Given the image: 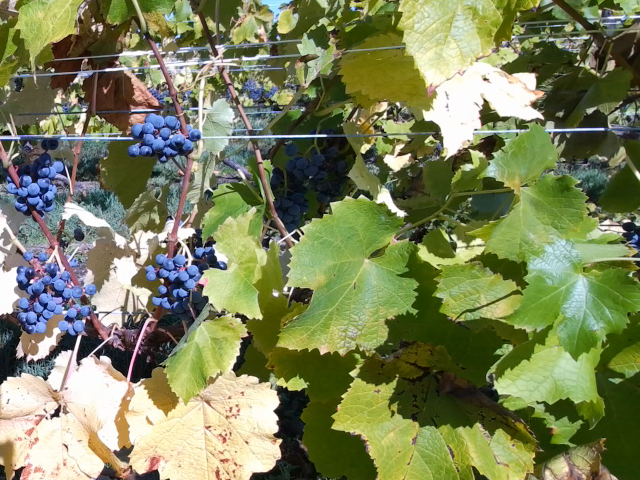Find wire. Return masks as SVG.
<instances>
[{"mask_svg": "<svg viewBox=\"0 0 640 480\" xmlns=\"http://www.w3.org/2000/svg\"><path fill=\"white\" fill-rule=\"evenodd\" d=\"M440 130L431 131H395V132H314V133H272L268 135L263 134H249L245 132L234 133H213L202 136L203 140L215 139V138H236L243 137L247 139H261L271 140L274 138H316V137H333V138H347V137H397V136H434L440 135Z\"/></svg>", "mask_w": 640, "mask_h": 480, "instance_id": "obj_1", "label": "wire"}, {"mask_svg": "<svg viewBox=\"0 0 640 480\" xmlns=\"http://www.w3.org/2000/svg\"><path fill=\"white\" fill-rule=\"evenodd\" d=\"M41 140H59L66 142H88V141H119L136 142V137L121 136H85L68 137L61 135H41L40 133H17L16 136H0V141L35 142Z\"/></svg>", "mask_w": 640, "mask_h": 480, "instance_id": "obj_2", "label": "wire"}, {"mask_svg": "<svg viewBox=\"0 0 640 480\" xmlns=\"http://www.w3.org/2000/svg\"><path fill=\"white\" fill-rule=\"evenodd\" d=\"M161 67H162L161 63H154V64L136 65V66H111L106 68H89V69H82V70H47V71H38V72L15 73L12 75V78L17 79V78L41 77V76H49V75H84V74H91V73H108L113 71L149 70V69H157Z\"/></svg>", "mask_w": 640, "mask_h": 480, "instance_id": "obj_3", "label": "wire"}, {"mask_svg": "<svg viewBox=\"0 0 640 480\" xmlns=\"http://www.w3.org/2000/svg\"><path fill=\"white\" fill-rule=\"evenodd\" d=\"M301 57L300 53L296 54H277V55H265V54H255V55H247V56H237V57H212V58H203L199 60L192 61H181V62H166V67H183V66H194L201 65L205 63H214V62H239V61H249V60H280V59H299Z\"/></svg>", "mask_w": 640, "mask_h": 480, "instance_id": "obj_4", "label": "wire"}, {"mask_svg": "<svg viewBox=\"0 0 640 480\" xmlns=\"http://www.w3.org/2000/svg\"><path fill=\"white\" fill-rule=\"evenodd\" d=\"M624 30H625L624 26H620L617 28H580V29L547 31V32L515 35L512 37V40L517 41V40L533 39V38H540V37L572 35V34H582V33H620Z\"/></svg>", "mask_w": 640, "mask_h": 480, "instance_id": "obj_5", "label": "wire"}, {"mask_svg": "<svg viewBox=\"0 0 640 480\" xmlns=\"http://www.w3.org/2000/svg\"><path fill=\"white\" fill-rule=\"evenodd\" d=\"M151 50L138 51V52H116L107 54H87L80 57H55V62H82L89 59H109L118 57H141L151 55Z\"/></svg>", "mask_w": 640, "mask_h": 480, "instance_id": "obj_6", "label": "wire"}, {"mask_svg": "<svg viewBox=\"0 0 640 480\" xmlns=\"http://www.w3.org/2000/svg\"><path fill=\"white\" fill-rule=\"evenodd\" d=\"M300 38H285L278 41H256L252 43H230V44H219L216 46L217 50L221 49H232V48H254L258 46H280L287 43H300Z\"/></svg>", "mask_w": 640, "mask_h": 480, "instance_id": "obj_7", "label": "wire"}, {"mask_svg": "<svg viewBox=\"0 0 640 480\" xmlns=\"http://www.w3.org/2000/svg\"><path fill=\"white\" fill-rule=\"evenodd\" d=\"M405 44L388 46V47H367L362 49H344V54H364L369 52H390L405 49Z\"/></svg>", "mask_w": 640, "mask_h": 480, "instance_id": "obj_8", "label": "wire"}]
</instances>
